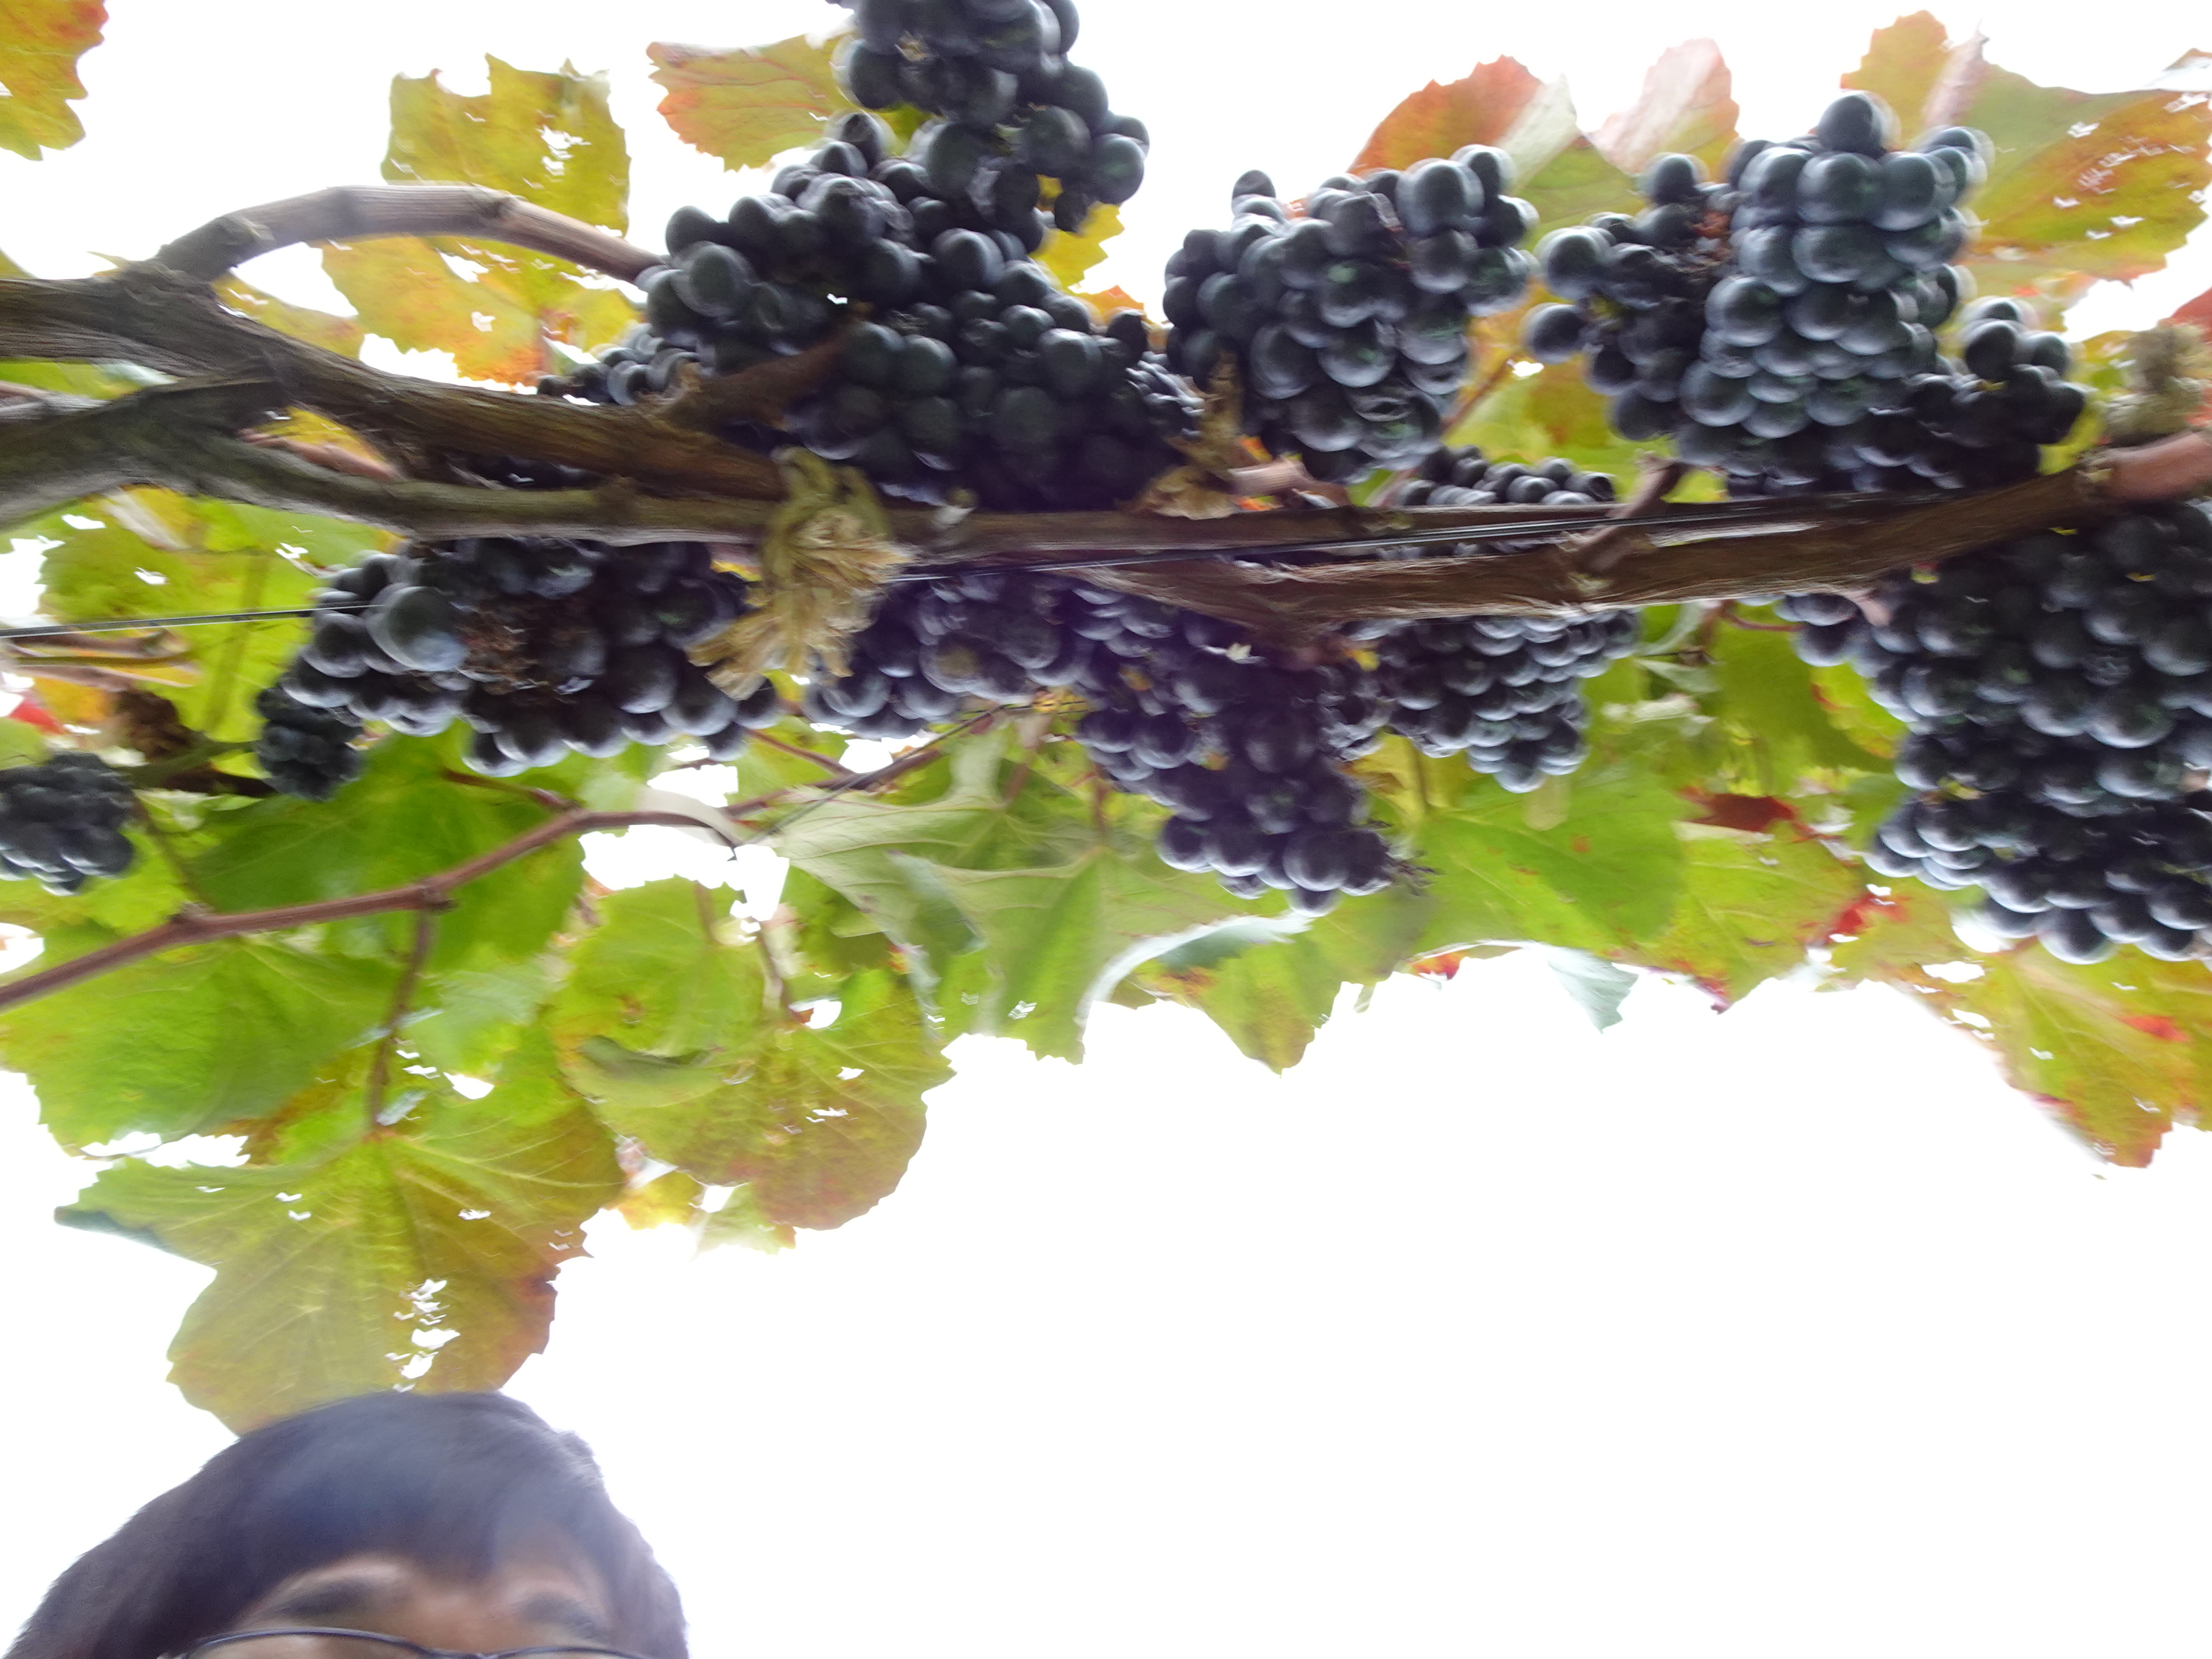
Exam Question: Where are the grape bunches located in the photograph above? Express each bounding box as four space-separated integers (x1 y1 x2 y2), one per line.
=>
827 2 1152 235
1058 579 1251 679
0 747 140 896
254 677 378 807
770 226 1215 519
1069 653 1420 922
1718 290 2090 505
1854 796 2212 974
797 557 1095 742
627 109 1050 375
465 439 617 494
277 531 619 741
1518 86 1999 488
1740 487 2212 804
531 316 709 412
1336 602 1649 796
456 540 791 783
1164 140 1540 489
1383 440 1624 657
